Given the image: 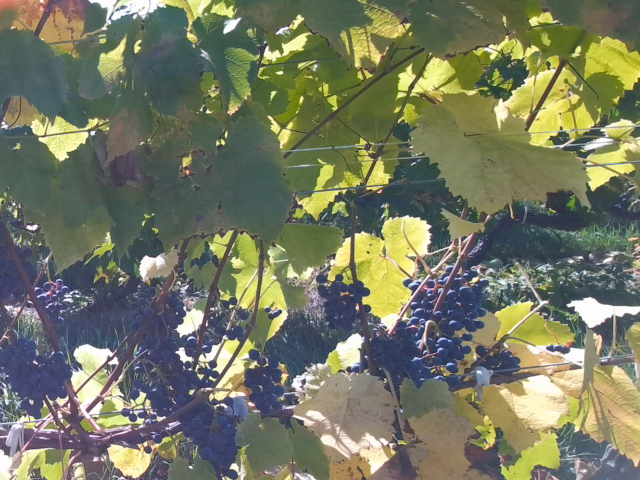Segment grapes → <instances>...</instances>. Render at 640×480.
Instances as JSON below:
<instances>
[{
    "instance_id": "1",
    "label": "grapes",
    "mask_w": 640,
    "mask_h": 480,
    "mask_svg": "<svg viewBox=\"0 0 640 480\" xmlns=\"http://www.w3.org/2000/svg\"><path fill=\"white\" fill-rule=\"evenodd\" d=\"M463 279L456 277L451 285L441 308L433 312V318L442 323L439 325L437 340L427 338L425 345L432 354L431 358H425L428 350L420 348L421 338L425 331L427 319L434 309L432 303L440 294L442 287L436 289L435 281L428 280L425 288L427 291H420L410 306L412 318L405 322L400 321L396 328V334L402 337L398 339H384L374 337L371 342L372 358L379 366L386 368V373L390 375L391 384L395 388V393H400L402 378L409 376L413 380V386L420 388L424 380L433 378L438 382H445L449 392H455L463 387L462 379L456 375H437L430 373L431 366L444 365V369L450 373L459 371L458 361L464 358V354L471 352V346L463 342H471L473 335L463 333L461 338L454 336L455 331L463 328L467 332H476L485 328L483 320L478 317H485L487 309L481 307L484 299L483 289L489 285L487 278L478 280L470 291L467 287H461Z\"/></svg>"
},
{
    "instance_id": "2",
    "label": "grapes",
    "mask_w": 640,
    "mask_h": 480,
    "mask_svg": "<svg viewBox=\"0 0 640 480\" xmlns=\"http://www.w3.org/2000/svg\"><path fill=\"white\" fill-rule=\"evenodd\" d=\"M155 295L156 288L151 286L137 295L136 302L129 304V309L132 311L131 319L133 321L131 327L133 329H137L146 317L151 319V323L147 328L149 332L145 334V343L139 347V351L135 353V356L140 359L146 356L148 360L155 364L163 362L161 371L169 373L166 376L167 383L178 394L174 396L173 402L163 381H159L155 385V391H150V387L146 383H142L140 379L134 378L132 380L133 390L130 392L129 398L137 400L141 390L147 395V399L151 401L154 412L145 421L147 426L155 424L157 417H168L172 411L194 400V397L188 394L194 384L202 388L211 387L212 383L208 378L199 379L198 375L192 370L184 371V367L186 369L191 368V362L186 361L183 363L180 360V356L176 354L180 348L184 347L185 354L188 357H192L197 344V339L194 335L180 337L179 332L176 330L178 326L184 323V318L187 316V312L183 309L184 304L179 299V293L172 291L170 297L165 299V303L169 308H165L162 313L164 324L161 321V317L151 307H148V303Z\"/></svg>"
},
{
    "instance_id": "3",
    "label": "grapes",
    "mask_w": 640,
    "mask_h": 480,
    "mask_svg": "<svg viewBox=\"0 0 640 480\" xmlns=\"http://www.w3.org/2000/svg\"><path fill=\"white\" fill-rule=\"evenodd\" d=\"M38 343L26 337L14 344L0 346V366H3L7 377L5 381L11 385L21 399H31L21 403V409L39 420L43 417L44 395L56 401L67 397L63 389L65 380L72 378L71 366L62 365L66 357L63 350L53 351L48 355L38 354Z\"/></svg>"
},
{
    "instance_id": "4",
    "label": "grapes",
    "mask_w": 640,
    "mask_h": 480,
    "mask_svg": "<svg viewBox=\"0 0 640 480\" xmlns=\"http://www.w3.org/2000/svg\"><path fill=\"white\" fill-rule=\"evenodd\" d=\"M180 425H186L182 434L185 438H194L192 444L196 446L198 456L202 460H209L217 471V477L224 476L232 480L238 477V472L231 468L236 462L238 449L235 447V417L219 414L217 424L224 428V434L214 432L204 426L212 424V411L206 403H198L191 410L183 412L178 417Z\"/></svg>"
},
{
    "instance_id": "5",
    "label": "grapes",
    "mask_w": 640,
    "mask_h": 480,
    "mask_svg": "<svg viewBox=\"0 0 640 480\" xmlns=\"http://www.w3.org/2000/svg\"><path fill=\"white\" fill-rule=\"evenodd\" d=\"M248 357L251 361H257L258 365L253 368H246L243 371V384L252 388V393L248 396V400L256 404L257 410L261 414H268L272 409L280 410L283 407L281 401H277V396H282L285 387L279 383L281 381L282 370L279 368L281 356L279 354H271L268 358V366L266 358L260 356V352L251 348L248 351Z\"/></svg>"
},
{
    "instance_id": "6",
    "label": "grapes",
    "mask_w": 640,
    "mask_h": 480,
    "mask_svg": "<svg viewBox=\"0 0 640 480\" xmlns=\"http://www.w3.org/2000/svg\"><path fill=\"white\" fill-rule=\"evenodd\" d=\"M343 280L344 277L337 274L328 288L325 285L318 287V294L326 300L322 307L329 327H342L345 332H349L356 317L355 307L370 294V289L365 287L362 280L349 284Z\"/></svg>"
},
{
    "instance_id": "7",
    "label": "grapes",
    "mask_w": 640,
    "mask_h": 480,
    "mask_svg": "<svg viewBox=\"0 0 640 480\" xmlns=\"http://www.w3.org/2000/svg\"><path fill=\"white\" fill-rule=\"evenodd\" d=\"M68 292L69 288L64 286V281L61 278H56L54 283L45 282L42 289L40 287L35 288V295L46 308L51 324L62 325L64 323V318L59 316V313L67 309V304L65 302L55 304L54 302Z\"/></svg>"
},
{
    "instance_id": "8",
    "label": "grapes",
    "mask_w": 640,
    "mask_h": 480,
    "mask_svg": "<svg viewBox=\"0 0 640 480\" xmlns=\"http://www.w3.org/2000/svg\"><path fill=\"white\" fill-rule=\"evenodd\" d=\"M521 359L517 356H513L512 351L500 350L499 353L489 355L486 361L481 363V366L486 370H498L503 368L520 367Z\"/></svg>"
},
{
    "instance_id": "9",
    "label": "grapes",
    "mask_w": 640,
    "mask_h": 480,
    "mask_svg": "<svg viewBox=\"0 0 640 480\" xmlns=\"http://www.w3.org/2000/svg\"><path fill=\"white\" fill-rule=\"evenodd\" d=\"M207 325L215 330L218 336H224L228 341L238 340L241 341L244 336V328L242 326H235L231 330H227L224 327H219L220 322L217 319H209Z\"/></svg>"
},
{
    "instance_id": "10",
    "label": "grapes",
    "mask_w": 640,
    "mask_h": 480,
    "mask_svg": "<svg viewBox=\"0 0 640 480\" xmlns=\"http://www.w3.org/2000/svg\"><path fill=\"white\" fill-rule=\"evenodd\" d=\"M121 415L123 417H128L130 422H136L139 419H145L147 417V412L144 409H139L136 414H131V410L129 408H123Z\"/></svg>"
},
{
    "instance_id": "11",
    "label": "grapes",
    "mask_w": 640,
    "mask_h": 480,
    "mask_svg": "<svg viewBox=\"0 0 640 480\" xmlns=\"http://www.w3.org/2000/svg\"><path fill=\"white\" fill-rule=\"evenodd\" d=\"M208 365H209L210 368H199L197 370V373L199 375H205V376L217 378L219 373L217 371H215V370H212V369H215L217 367V362L215 360H210L208 362Z\"/></svg>"
},
{
    "instance_id": "12",
    "label": "grapes",
    "mask_w": 640,
    "mask_h": 480,
    "mask_svg": "<svg viewBox=\"0 0 640 480\" xmlns=\"http://www.w3.org/2000/svg\"><path fill=\"white\" fill-rule=\"evenodd\" d=\"M264 312L266 313V318L268 320H273L280 316L283 313V310L281 308H278L276 311L271 312V308L269 306H266L264 308Z\"/></svg>"
},
{
    "instance_id": "13",
    "label": "grapes",
    "mask_w": 640,
    "mask_h": 480,
    "mask_svg": "<svg viewBox=\"0 0 640 480\" xmlns=\"http://www.w3.org/2000/svg\"><path fill=\"white\" fill-rule=\"evenodd\" d=\"M452 266L453 265H448L445 267L444 269V273H442L438 278H437V282L439 285H443V283L447 280L449 274L451 273L452 270Z\"/></svg>"
}]
</instances>
